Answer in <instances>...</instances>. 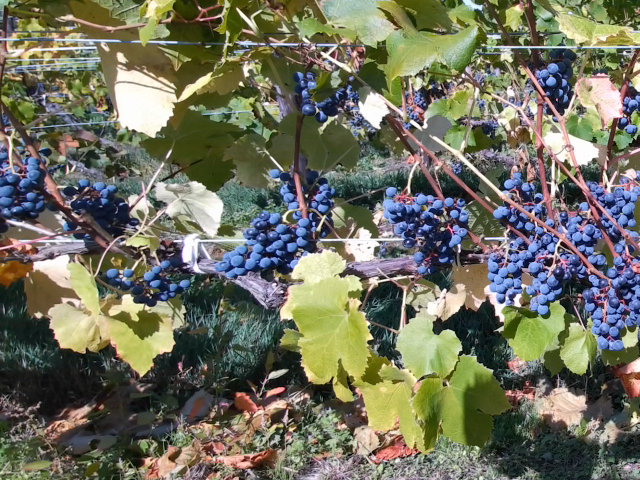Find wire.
<instances>
[{
	"instance_id": "1",
	"label": "wire",
	"mask_w": 640,
	"mask_h": 480,
	"mask_svg": "<svg viewBox=\"0 0 640 480\" xmlns=\"http://www.w3.org/2000/svg\"><path fill=\"white\" fill-rule=\"evenodd\" d=\"M479 50H492V49H515V50H554V51H588L596 49H617V50H634L640 49V44L632 45H619V44H594L585 46H576L575 44H569L564 46L557 45H517V44H490L479 45Z\"/></svg>"
},
{
	"instance_id": "4",
	"label": "wire",
	"mask_w": 640,
	"mask_h": 480,
	"mask_svg": "<svg viewBox=\"0 0 640 480\" xmlns=\"http://www.w3.org/2000/svg\"><path fill=\"white\" fill-rule=\"evenodd\" d=\"M403 236H389V237H312L311 241L316 243H327V242H345V243H355V242H391V241H403Z\"/></svg>"
},
{
	"instance_id": "2",
	"label": "wire",
	"mask_w": 640,
	"mask_h": 480,
	"mask_svg": "<svg viewBox=\"0 0 640 480\" xmlns=\"http://www.w3.org/2000/svg\"><path fill=\"white\" fill-rule=\"evenodd\" d=\"M0 42H59V43H93V44H131L140 43L139 38L128 39H95V38H61V37H0Z\"/></svg>"
},
{
	"instance_id": "3",
	"label": "wire",
	"mask_w": 640,
	"mask_h": 480,
	"mask_svg": "<svg viewBox=\"0 0 640 480\" xmlns=\"http://www.w3.org/2000/svg\"><path fill=\"white\" fill-rule=\"evenodd\" d=\"M236 46H257V47H297V48H318V47H359L368 48V43L362 42H315V43H299V42H259V41H236Z\"/></svg>"
}]
</instances>
